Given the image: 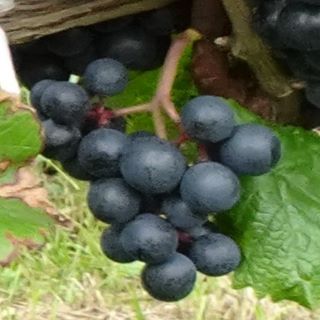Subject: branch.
<instances>
[{
  "label": "branch",
  "mask_w": 320,
  "mask_h": 320,
  "mask_svg": "<svg viewBox=\"0 0 320 320\" xmlns=\"http://www.w3.org/2000/svg\"><path fill=\"white\" fill-rule=\"evenodd\" d=\"M190 27L202 34L194 40L186 66L198 95H215L227 100L230 49L215 42L217 37L230 32V17L223 0H195Z\"/></svg>",
  "instance_id": "branch-1"
}]
</instances>
